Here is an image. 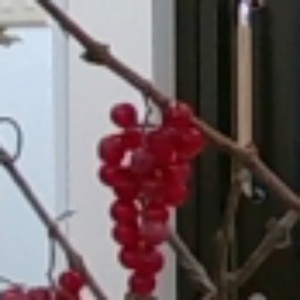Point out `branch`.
Masks as SVG:
<instances>
[{"mask_svg":"<svg viewBox=\"0 0 300 300\" xmlns=\"http://www.w3.org/2000/svg\"><path fill=\"white\" fill-rule=\"evenodd\" d=\"M0 166L10 176V179L15 184L21 196L27 204L32 208L33 212L38 216L43 223L48 235L58 244L65 252L66 260L72 271L79 274L83 284L96 300H111L100 288L96 285L84 262V257L77 252L71 243L65 238L64 234L59 230L55 220L50 215L49 211L44 207L43 203L38 199L32 191L29 184L21 174L20 170L14 165V161L10 158L7 151L0 145Z\"/></svg>","mask_w":300,"mask_h":300,"instance_id":"3","label":"branch"},{"mask_svg":"<svg viewBox=\"0 0 300 300\" xmlns=\"http://www.w3.org/2000/svg\"><path fill=\"white\" fill-rule=\"evenodd\" d=\"M36 2L57 22L58 25L72 34L81 44L84 52L81 58L94 65H106L109 69L126 79L136 89L144 92L160 110L164 111L172 101L158 88L133 73L125 64L109 53L107 45H101L86 33L75 21L67 16L52 0H36Z\"/></svg>","mask_w":300,"mask_h":300,"instance_id":"2","label":"branch"},{"mask_svg":"<svg viewBox=\"0 0 300 300\" xmlns=\"http://www.w3.org/2000/svg\"><path fill=\"white\" fill-rule=\"evenodd\" d=\"M195 122L203 126L205 137L212 144L251 166L290 206L286 214L265 235L253 254L235 271L227 273L216 285L210 279L194 250L170 229V234L164 241H167L179 253L188 266L200 289L205 293L203 300H222L235 286L244 284L247 277L263 264L267 256L275 250L288 231L297 223L300 218V196L265 164L255 145L234 141L198 117Z\"/></svg>","mask_w":300,"mask_h":300,"instance_id":"1","label":"branch"}]
</instances>
